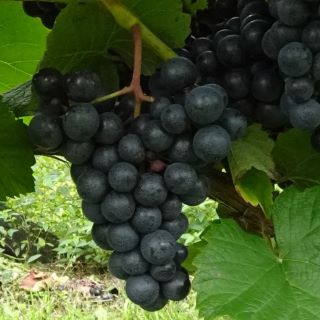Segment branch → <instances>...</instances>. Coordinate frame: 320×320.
<instances>
[{
	"label": "branch",
	"instance_id": "1",
	"mask_svg": "<svg viewBox=\"0 0 320 320\" xmlns=\"http://www.w3.org/2000/svg\"><path fill=\"white\" fill-rule=\"evenodd\" d=\"M111 13L114 20L124 29L130 31L131 26H142V43L158 55L164 62L170 58L180 57L167 44L156 37L149 28L118 0H101Z\"/></svg>",
	"mask_w": 320,
	"mask_h": 320
}]
</instances>
